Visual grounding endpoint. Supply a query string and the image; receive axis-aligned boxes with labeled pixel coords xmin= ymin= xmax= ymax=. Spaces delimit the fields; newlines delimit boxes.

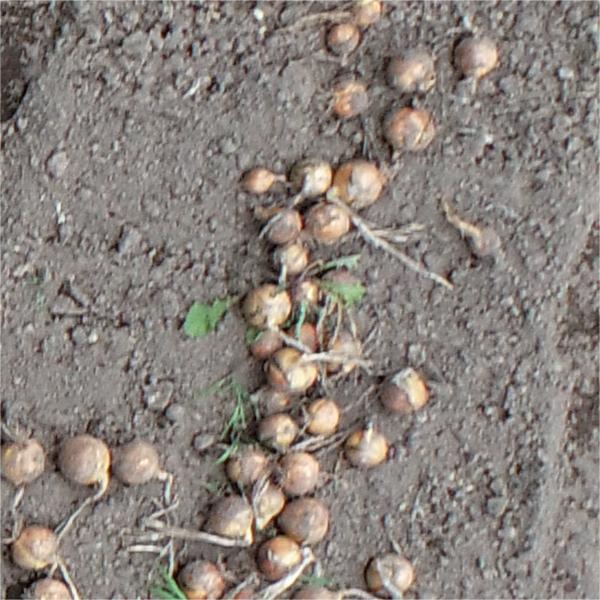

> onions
xmin=345 ymin=426 xmax=387 ymax=465
xmin=257 ymin=536 xmax=300 ymax=578
xmin=288 ymin=581 xmax=334 ymax=600
xmin=228 ymin=447 xmax=272 ymax=487
xmin=255 ymin=385 xmax=296 ymax=416
xmin=303 ymin=397 xmax=338 ymax=434
xmin=294 ymin=160 xmax=331 ymax=197
xmin=378 ymin=368 xmax=427 ymax=412
xmin=114 ymin=438 xmax=158 ymax=480
xmin=2 ymin=442 xmax=46 ymax=482
xmin=452 ymin=34 xmax=497 ymax=77
xmin=267 ymin=350 xmax=315 ymax=393
xmin=205 ymin=495 xmax=259 ymax=541
xmin=328 ymin=334 xmax=361 ymax=366
xmin=278 ymin=244 xmax=311 ymax=276
xmin=265 ymin=209 xmax=301 ymax=245
xmin=254 ymin=194 xmax=284 ymax=220
xmin=278 ymin=497 xmax=328 ymax=542
xmin=178 ymin=559 xmax=224 ymax=598
xmin=324 ymin=18 xmax=359 ymax=53
xmin=288 ymin=321 xmax=315 ymax=350
xmin=295 ymin=278 xmax=322 ymax=306
xmin=306 ymin=203 xmax=348 ymax=244
xmin=28 ymin=573 xmax=74 ymax=599
xmin=258 ymin=410 xmax=299 ymax=448
xmin=364 ymin=552 xmax=412 ymax=592
xmin=241 ymin=166 xmax=275 ymax=193
xmin=238 ymin=284 xmax=290 ymax=328
xmin=223 ymin=587 xmax=260 ymax=600
xmin=351 ymin=0 xmax=382 ymax=29
xmin=388 ymin=50 xmax=433 ymax=92
xmin=56 ymin=435 xmax=110 ymax=489
xmin=330 ymin=160 xmax=384 ymax=207
xmin=251 ymin=328 xmax=284 ymax=359
xmin=328 ymin=79 xmax=370 ymax=119
xmin=250 ymin=480 xmax=286 ymax=520
xmin=385 ymin=105 xmax=434 ymax=150
xmin=278 ymin=451 xmax=319 ymax=493
xmin=11 ymin=526 xmax=57 ymax=569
